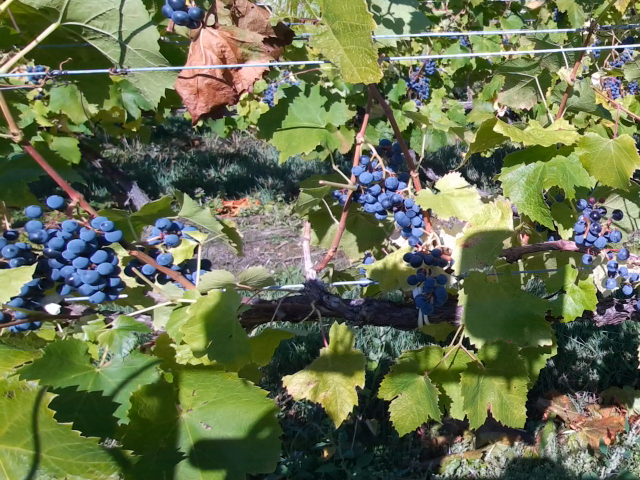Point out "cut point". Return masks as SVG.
Masks as SVG:
<instances>
[{
  "instance_id": "1",
  "label": "cut point",
  "mask_w": 640,
  "mask_h": 480,
  "mask_svg": "<svg viewBox=\"0 0 640 480\" xmlns=\"http://www.w3.org/2000/svg\"><path fill=\"white\" fill-rule=\"evenodd\" d=\"M415 176H416V173H415V172H411V173H410V177H409V180H408V183H407V188H408V189H411V188H412V185H413V183H414Z\"/></svg>"
}]
</instances>
